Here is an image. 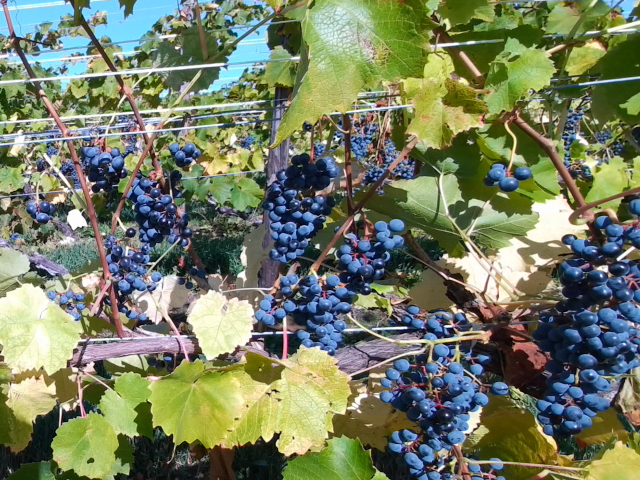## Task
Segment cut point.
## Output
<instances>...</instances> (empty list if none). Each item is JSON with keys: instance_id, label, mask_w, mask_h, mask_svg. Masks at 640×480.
<instances>
[{"instance_id": "6a23745f", "label": "cut point", "mask_w": 640, "mask_h": 480, "mask_svg": "<svg viewBox=\"0 0 640 480\" xmlns=\"http://www.w3.org/2000/svg\"><path fill=\"white\" fill-rule=\"evenodd\" d=\"M61 146H62V142H59L58 151H57L56 157L54 158L53 161L50 162L49 167L45 171L41 172V177H44V175L49 173L53 169V165L57 163L58 159L60 158V154H61Z\"/></svg>"}, {"instance_id": "7d7e1d6f", "label": "cut point", "mask_w": 640, "mask_h": 480, "mask_svg": "<svg viewBox=\"0 0 640 480\" xmlns=\"http://www.w3.org/2000/svg\"><path fill=\"white\" fill-rule=\"evenodd\" d=\"M511 122V118H507L506 122L504 123V129L509 133V135L514 138V142H513V149L512 152L516 151V144H517V135H515L511 129L508 127V124Z\"/></svg>"}, {"instance_id": "deb38ca7", "label": "cut point", "mask_w": 640, "mask_h": 480, "mask_svg": "<svg viewBox=\"0 0 640 480\" xmlns=\"http://www.w3.org/2000/svg\"><path fill=\"white\" fill-rule=\"evenodd\" d=\"M473 333L481 334V333H484V332H481L479 330H470V331H465V332H462V333H458L457 337H461V336L468 335V334H473Z\"/></svg>"}, {"instance_id": "40658cd0", "label": "cut point", "mask_w": 640, "mask_h": 480, "mask_svg": "<svg viewBox=\"0 0 640 480\" xmlns=\"http://www.w3.org/2000/svg\"><path fill=\"white\" fill-rule=\"evenodd\" d=\"M182 117H184V114H179V115H177V116L170 117V118H168V120H166V121H165V124H164L163 126H166V125H167V124H169L171 121H173V120H175V119H180V118H182Z\"/></svg>"}, {"instance_id": "1e8049ac", "label": "cut point", "mask_w": 640, "mask_h": 480, "mask_svg": "<svg viewBox=\"0 0 640 480\" xmlns=\"http://www.w3.org/2000/svg\"><path fill=\"white\" fill-rule=\"evenodd\" d=\"M125 98H126V95L124 94V95L120 98V100L118 101V103H117L116 107L114 108V113H117V111L119 110V108H120V106H121V104H122L123 100H125Z\"/></svg>"}, {"instance_id": "20b288c4", "label": "cut point", "mask_w": 640, "mask_h": 480, "mask_svg": "<svg viewBox=\"0 0 640 480\" xmlns=\"http://www.w3.org/2000/svg\"><path fill=\"white\" fill-rule=\"evenodd\" d=\"M349 229V224L346 226V228L343 231V235L346 239L351 240V237L347 235V231Z\"/></svg>"}]
</instances>
